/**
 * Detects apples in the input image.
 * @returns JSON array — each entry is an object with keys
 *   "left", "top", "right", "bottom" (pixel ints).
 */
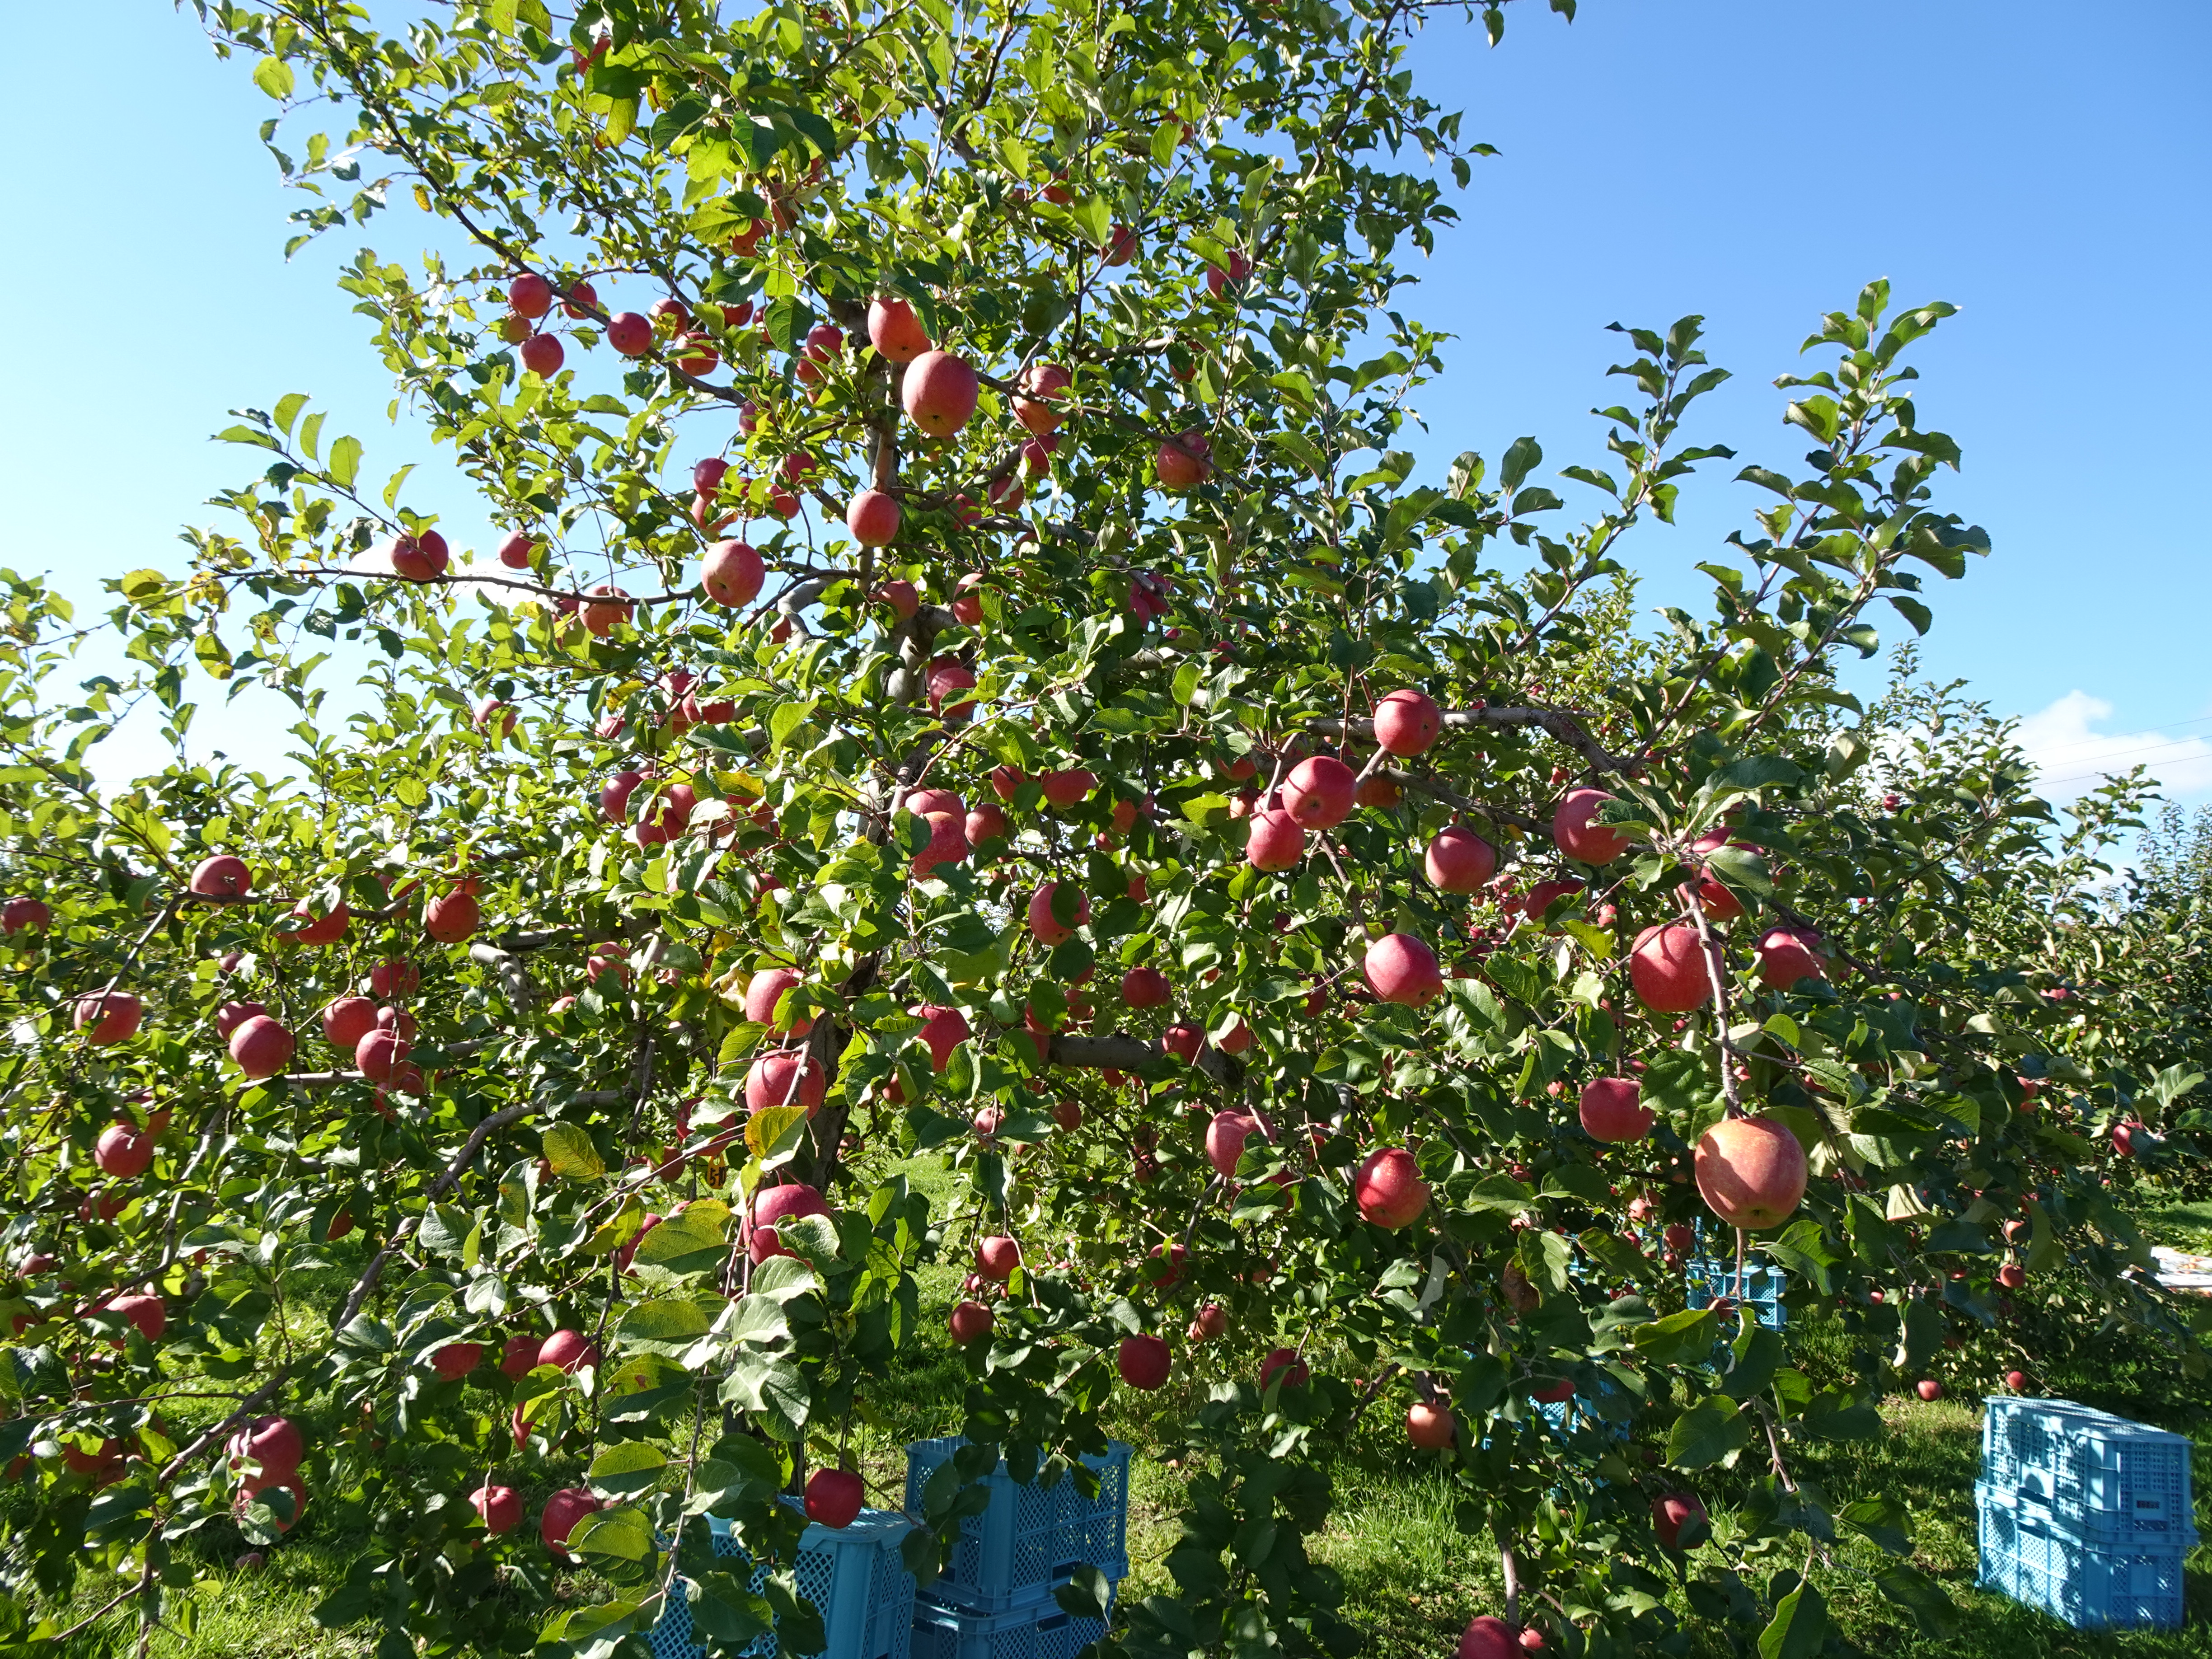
[
  {"left": 450, "top": 848, "right": 487, "bottom": 895},
  {"left": 1218, "top": 614, "right": 1250, "bottom": 642},
  {"left": 1237, "top": 1244, "right": 1282, "bottom": 1290},
  {"left": 1134, "top": 1153, "right": 1174, "bottom": 1189},
  {"left": 744, "top": 963, "right": 819, "bottom": 1040},
  {"left": 74, "top": 1282, "right": 127, "bottom": 1342},
  {"left": 986, "top": 470, "right": 1026, "bottom": 515},
  {"left": 770, "top": 178, "right": 813, "bottom": 213},
  {"left": 681, "top": 681, "right": 737, "bottom": 729},
  {"left": 323, "top": 996, "right": 379, "bottom": 1051},
  {"left": 700, "top": 538, "right": 766, "bottom": 609},
  {"left": 216, "top": 1002, "right": 267, "bottom": 1043},
  {"left": 656, "top": 673, "right": 704, "bottom": 719},
  {"left": 1668, "top": 1037, "right": 1684, "bottom": 1052},
  {"left": 1324, "top": 727, "right": 1359, "bottom": 767},
  {"left": 1119, "top": 1329, "right": 1170, "bottom": 1392},
  {"left": 1881, "top": 791, "right": 1902, "bottom": 813},
  {"left": 544, "top": 995, "right": 598, "bottom": 1048},
  {"left": 654, "top": 700, "right": 695, "bottom": 736},
  {"left": 1186, "top": 1300, "right": 1226, "bottom": 1345},
  {"left": 1575, "top": 1225, "right": 1608, "bottom": 1252},
  {"left": 376, "top": 1007, "right": 416, "bottom": 1050},
  {"left": 1864, "top": 1290, "right": 1885, "bottom": 1306},
  {"left": 677, "top": 1096, "right": 736, "bottom": 1158},
  {"left": 801, "top": 1467, "right": 864, "bottom": 1531},
  {"left": 348, "top": 1420, "right": 390, "bottom": 1449},
  {"left": 1084, "top": 1174, "right": 1108, "bottom": 1203},
  {"left": 1628, "top": 1197, "right": 1665, "bottom": 1227},
  {"left": 1579, "top": 1078, "right": 1656, "bottom": 1144},
  {"left": 2011, "top": 1098, "right": 2033, "bottom": 1117},
  {"left": 655, "top": 964, "right": 690, "bottom": 998},
  {"left": 577, "top": 585, "right": 635, "bottom": 638},
  {"left": 751, "top": 304, "right": 792, "bottom": 345},
  {"left": 894, "top": 1004, "right": 969, "bottom": 1076},
  {"left": 2112, "top": 1120, "right": 2147, "bottom": 1158},
  {"left": 1936, "top": 1273, "right": 1967, "bottom": 1299},
  {"left": 1252, "top": 791, "right": 1290, "bottom": 825},
  {"left": 1180, "top": 1100, "right": 1216, "bottom": 1138},
  {"left": 648, "top": 298, "right": 691, "bottom": 343},
  {"left": 2068, "top": 1128, "right": 2082, "bottom": 1143},
  {"left": 497, "top": 1335, "right": 553, "bottom": 1386},
  {"left": 2165, "top": 1285, "right": 2181, "bottom": 1294},
  {"left": 811, "top": 7, "right": 838, "bottom": 38},
  {"left": 1450, "top": 959, "right": 1482, "bottom": 984},
  {"left": 598, "top": 715, "right": 633, "bottom": 747},
  {"left": 507, "top": 272, "right": 551, "bottom": 318},
  {"left": 2058, "top": 1104, "right": 2077, "bottom": 1119},
  {"left": 2020, "top": 1188, "right": 2039, "bottom": 1211},
  {"left": 2039, "top": 983, "right": 2071, "bottom": 1008},
  {"left": 591, "top": 130, "right": 617, "bottom": 153},
  {"left": 1696, "top": 1115, "right": 1808, "bottom": 1230},
  {"left": 1472, "top": 747, "right": 1489, "bottom": 765},
  {"left": 745, "top": 609, "right": 792, "bottom": 649},
  {"left": 1754, "top": 925, "right": 1831, "bottom": 991},
  {"left": 1549, "top": 763, "right": 1574, "bottom": 786},
  {"left": 867, "top": 288, "right": 948, "bottom": 366},
  {"left": 1944, "top": 1011, "right": 1968, "bottom": 1034},
  {"left": 95, "top": 1124, "right": 154, "bottom": 1179},
  {"left": 1964, "top": 1185, "right": 1988, "bottom": 1211},
  {"left": 978, "top": 1235, "right": 1021, "bottom": 1281},
  {"left": 1147, "top": 1244, "right": 1203, "bottom": 1293},
  {"left": 724, "top": 205, "right": 766, "bottom": 260},
  {"left": 930, "top": 666, "right": 976, "bottom": 721},
  {"left": 1350, "top": 757, "right": 1407, "bottom": 809},
  {"left": 807, "top": 325, "right": 849, "bottom": 366},
  {"left": 1529, "top": 681, "right": 1550, "bottom": 699},
  {"left": 511, "top": 1395, "right": 576, "bottom": 1461},
  {"left": 1927, "top": 995, "right": 1951, "bottom": 1017},
  {"left": 601, "top": 769, "right": 653, "bottom": 827},
  {"left": 1217, "top": 568, "right": 1252, "bottom": 595},
  {"left": 728, "top": 833, "right": 763, "bottom": 864},
  {"left": 1953, "top": 1135, "right": 1971, "bottom": 1153},
  {"left": 1629, "top": 924, "right": 1726, "bottom": 1011},
  {"left": 1599, "top": 904, "right": 1623, "bottom": 931},
  {"left": 1336, "top": 843, "right": 1356, "bottom": 862},
  {"left": 1679, "top": 762, "right": 1695, "bottom": 776},
  {"left": 1600, "top": 717, "right": 1617, "bottom": 734},
  {"left": 1526, "top": 878, "right": 1594, "bottom": 940},
  {"left": 1031, "top": 881, "right": 1088, "bottom": 944},
  {"left": 561, "top": 1422, "right": 605, "bottom": 1465},
  {"left": 1598, "top": 991, "right": 1627, "bottom": 1021},
  {"left": 1010, "top": 364, "right": 1075, "bottom": 437},
  {"left": 1414, "top": 1222, "right": 1471, "bottom": 1278},
  {"left": 1246, "top": 808, "right": 1305, "bottom": 871},
  {"left": 1384, "top": 1050, "right": 1420, "bottom": 1077},
  {"left": 2179, "top": 1262, "right": 2195, "bottom": 1277},
  {"left": 1610, "top": 1183, "right": 1625, "bottom": 1197},
  {"left": 794, "top": 146, "right": 828, "bottom": 189},
  {"left": 1643, "top": 743, "right": 1666, "bottom": 767},
  {"left": 881, "top": 1066, "right": 911, "bottom": 1106},
  {"left": 1061, "top": 956, "right": 1097, "bottom": 988},
  {"left": 665, "top": 1200, "right": 701, "bottom": 1230},
  {"left": 1343, "top": 988, "right": 1377, "bottom": 1021},
  {"left": 671, "top": 333, "right": 720, "bottom": 379},
  {"left": 559, "top": 278, "right": 598, "bottom": 321},
  {"left": 638, "top": 804, "right": 685, "bottom": 859},
  {"left": 408, "top": 1297, "right": 482, "bottom": 1384},
  {"left": 608, "top": 310, "right": 652, "bottom": 357},
  {"left": 901, "top": 349, "right": 980, "bottom": 440},
  {"left": 1261, "top": 1176, "right": 1303, "bottom": 1210},
  {"left": 1039, "top": 163, "right": 1079, "bottom": 204},
  {"left": 1203, "top": 956, "right": 1241, "bottom": 990},
  {"left": 1775, "top": 864, "right": 1799, "bottom": 884},
  {"left": 1424, "top": 825, "right": 1498, "bottom": 895},
  {"left": 648, "top": 1145, "right": 686, "bottom": 1184},
  {"left": 1519, "top": 1625, "right": 1555, "bottom": 1654},
  {"left": 1034, "top": 361, "right": 1088, "bottom": 398},
  {"left": 1205, "top": 641, "right": 1247, "bottom": 674},
  {"left": 18, "top": 1252, "right": 78, "bottom": 1303},
  {"left": 359, "top": 1401, "right": 389, "bottom": 1431},
  {"left": 1944, "top": 1326, "right": 1968, "bottom": 1350},
  {"left": 217, "top": 952, "right": 248, "bottom": 983},
  {"left": 1885, "top": 980, "right": 1903, "bottom": 999},
  {"left": 1259, "top": 1346, "right": 1311, "bottom": 1406},
  {"left": 741, "top": 874, "right": 792, "bottom": 914},
  {"left": 2130, "top": 1262, "right": 2146, "bottom": 1274},
  {"left": 990, "top": 856, "right": 1019, "bottom": 884},
  {"left": 2003, "top": 1219, "right": 2025, "bottom": 1240},
  {"left": 80, "top": 1189, "right": 130, "bottom": 1232},
  {"left": 1129, "top": 788, "right": 1155, "bottom": 815},
  {"left": 66, "top": 1350, "right": 107, "bottom": 1386},
  {"left": 189, "top": 1243, "right": 217, "bottom": 1270},
  {"left": 1044, "top": 758, "right": 1091, "bottom": 811},
  {"left": 645, "top": 868, "right": 696, "bottom": 911},
  {"left": 1167, "top": 109, "right": 1195, "bottom": 147},
  {"left": 387, "top": 1059, "right": 429, "bottom": 1101},
  {"left": 1281, "top": 754, "right": 1359, "bottom": 831},
  {"left": 1224, "top": 1180, "right": 1258, "bottom": 1210},
  {"left": 236, "top": 1552, "right": 264, "bottom": 1582},
  {"left": 1012, "top": 1132, "right": 1046, "bottom": 1158},
  {"left": 1466, "top": 923, "right": 1488, "bottom": 943},
  {"left": 1211, "top": 1012, "right": 1250, "bottom": 1055},
  {"left": 1837, "top": 1292, "right": 1851, "bottom": 1307},
  {"left": 2167, "top": 974, "right": 2176, "bottom": 983},
  {"left": 1598, "top": 956, "right": 1616, "bottom": 970},
  {"left": 669, "top": 767, "right": 727, "bottom": 828},
  {"left": 1352, "top": 1375, "right": 1366, "bottom": 1388},
  {"left": 774, "top": 449, "right": 817, "bottom": 497},
  {"left": 2199, "top": 1287, "right": 2211, "bottom": 1300},
  {"left": 1665, "top": 1220, "right": 1695, "bottom": 1251},
  {"left": 1834, "top": 1166, "right": 1870, "bottom": 1195},
  {"left": 747, "top": 1048, "right": 828, "bottom": 1135},
  {"left": 3, "top": 898, "right": 51, "bottom": 951},
  {"left": 1513, "top": 1156, "right": 1541, "bottom": 1183},
  {"left": 2006, "top": 1369, "right": 2028, "bottom": 1392},
  {"left": 1570, "top": 698, "right": 1585, "bottom": 712},
  {"left": 1229, "top": 788, "right": 1260, "bottom": 826},
  {"left": 2048, "top": 1165, "right": 2058, "bottom": 1179},
  {"left": 1033, "top": 700, "right": 1083, "bottom": 740},
  {"left": 1286, "top": 969, "right": 1330, "bottom": 1020},
  {"left": 391, "top": 528, "right": 449, "bottom": 582},
  {"left": 1597, "top": 666, "right": 1616, "bottom": 682},
  {"left": 537, "top": 1327, "right": 601, "bottom": 1395},
  {"left": 1609, "top": 1274, "right": 1640, "bottom": 1310},
  {"left": 1857, "top": 895, "right": 1869, "bottom": 907},
  {"left": 1520, "top": 1095, "right": 1530, "bottom": 1108},
  {"left": 587, "top": 941, "right": 631, "bottom": 989},
  {"left": 768, "top": 195, "right": 804, "bottom": 230},
  {"left": 763, "top": 483, "right": 804, "bottom": 521},
  {"left": 1373, "top": 689, "right": 1442, "bottom": 758},
  {"left": 1204, "top": 1105, "right": 1276, "bottom": 1180},
  {"left": 797, "top": 353, "right": 830, "bottom": 387},
  {"left": 1043, "top": 1248, "right": 1067, "bottom": 1266},
  {"left": 973, "top": 1106, "right": 1013, "bottom": 1149},
  {"left": 1094, "top": 222, "right": 1138, "bottom": 267},
  {"left": 374, "top": 1073, "right": 429, "bottom": 1126},
  {"left": 1362, "top": 933, "right": 1442, "bottom": 1011},
  {"left": 76, "top": 1384, "right": 114, "bottom": 1419},
  {"left": 1169, "top": 331, "right": 1223, "bottom": 382},
  {"left": 868, "top": 756, "right": 891, "bottom": 778},
  {"left": 372, "top": 955, "right": 421, "bottom": 1002},
  {"left": 647, "top": 81, "right": 674, "bottom": 109},
  {"left": 1005, "top": 178, "right": 1040, "bottom": 212},
  {"left": 690, "top": 500, "right": 733, "bottom": 534},
  {"left": 1857, "top": 1055, "right": 1892, "bottom": 1081},
  {"left": 108, "top": 1296, "right": 167, "bottom": 1350},
  {"left": 1919, "top": 1184, "right": 1932, "bottom": 1199},
  {"left": 906, "top": 814, "right": 966, "bottom": 885},
  {"left": 1895, "top": 1227, "right": 1916, "bottom": 1253},
  {"left": 229, "top": 1016, "right": 298, "bottom": 1080},
  {"left": 358, "top": 1028, "right": 413, "bottom": 1084},
  {"left": 2079, "top": 1026, "right": 2094, "bottom": 1041},
  {"left": 1257, "top": 911, "right": 1293, "bottom": 955},
  {"left": 1663, "top": 1251, "right": 1683, "bottom": 1270},
  {"left": 718, "top": 288, "right": 754, "bottom": 327},
  {"left": 375, "top": 869, "right": 424, "bottom": 919},
  {"left": 1408, "top": 1403, "right": 1456, "bottom": 1452},
  {"left": 557, "top": 597, "right": 584, "bottom": 624},
  {"left": 1028, "top": 677, "right": 1075, "bottom": 729},
  {"left": 623, "top": 1155, "right": 659, "bottom": 1183},
  {"left": 295, "top": 893, "right": 352, "bottom": 947},
  {"left": 932, "top": 277, "right": 966, "bottom": 312},
  {"left": 1354, "top": 1144, "right": 1432, "bottom": 1231},
  {"left": 1802, "top": 1068, "right": 1829, "bottom": 1097},
  {"left": 1596, "top": 1146, "right": 1615, "bottom": 1162},
  {"left": 615, "top": 1361, "right": 658, "bottom": 1401},
  {"left": 1677, "top": 823, "right": 1776, "bottom": 922},
  {"left": 1706, "top": 1294, "right": 1734, "bottom": 1322},
  {"left": 1102, "top": 1056, "right": 1147, "bottom": 1093},
  {"left": 1120, "top": 967, "right": 1174, "bottom": 1012},
  {"left": 1023, "top": 997, "right": 1067, "bottom": 1038},
  {"left": 556, "top": 613, "right": 593, "bottom": 654},
  {"left": 2014, "top": 1076, "right": 2038, "bottom": 1103},
  {"left": 221, "top": 1413, "right": 305, "bottom": 1493},
  {"left": 1554, "top": 1219, "right": 1574, "bottom": 1237},
  {"left": 698, "top": 953, "right": 749, "bottom": 999},
  {"left": 1618, "top": 1234, "right": 1641, "bottom": 1251},
  {"left": 190, "top": 855, "right": 252, "bottom": 913},
  {"left": 1013, "top": 568, "right": 1052, "bottom": 604},
  {"left": 119, "top": 1089, "right": 177, "bottom": 1136},
  {"left": 834, "top": 1132, "right": 866, "bottom": 1161},
  {"left": 1493, "top": 872, "right": 1515, "bottom": 895},
  {"left": 1094, "top": 794, "right": 1138, "bottom": 855},
  {"left": 1468, "top": 693, "right": 1488, "bottom": 713},
  {"left": 638, "top": 768, "right": 673, "bottom": 804},
  {"left": 961, "top": 804, "right": 1006, "bottom": 850},
  {"left": 427, "top": 893, "right": 480, "bottom": 944},
  {"left": 542, "top": 1487, "right": 605, "bottom": 1555},
  {"left": 1064, "top": 981, "right": 1097, "bottom": 1024},
  {"left": 1204, "top": 248, "right": 1258, "bottom": 307},
  {"left": 1556, "top": 1507, "right": 1568, "bottom": 1519},
  {"left": 1356, "top": 1121, "right": 1386, "bottom": 1149},
  {"left": 1457, "top": 1616, "right": 1525, "bottom": 1659},
  {"left": 1115, "top": 859, "right": 1153, "bottom": 905},
  {"left": 1733, "top": 1064, "right": 1756, "bottom": 1087},
  {"left": 66, "top": 1426, "right": 122, "bottom": 1492},
  {"left": 1019, "top": 433, "right": 1067, "bottom": 478},
  {"left": 1917, "top": 1379, "right": 1942, "bottom": 1403},
  {"left": 1049, "top": 1261, "right": 1096, "bottom": 1300},
  {"left": 1655, "top": 1156, "right": 1692, "bottom": 1191},
  {"left": 990, "top": 760, "right": 1041, "bottom": 802},
  {"left": 610, "top": 1212, "right": 665, "bottom": 1282},
  {"left": 1642, "top": 1246, "right": 1657, "bottom": 1261},
  {"left": 1017, "top": 1075, "right": 1048, "bottom": 1106},
  {"left": 1300, "top": 1120, "right": 1338, "bottom": 1159},
  {"left": 739, "top": 397, "right": 789, "bottom": 447},
  {"left": 1448, "top": 811, "right": 1467, "bottom": 829},
  {"left": 496, "top": 529, "right": 539, "bottom": 571},
  {"left": 2190, "top": 1261, "right": 2200, "bottom": 1270},
  {"left": 1119, "top": 574, "right": 1177, "bottom": 629},
  {"left": 467, "top": 1484, "right": 525, "bottom": 1539},
  {"left": 864, "top": 588, "right": 880, "bottom": 604},
  {"left": 1335, "top": 819, "right": 1370, "bottom": 851},
  {"left": 1130, "top": 1117, "right": 1166, "bottom": 1154},
  {"left": 728, "top": 783, "right": 780, "bottom": 830},
  {"left": 1032, "top": 1263, "right": 1047, "bottom": 1277},
  {"left": 1999, "top": 1264, "right": 2027, "bottom": 1289},
  {"left": 1162, "top": 1023, "right": 1207, "bottom": 1069},
  {"left": 1217, "top": 733, "right": 1260, "bottom": 784},
  {"left": 1156, "top": 429, "right": 1215, "bottom": 490},
  {"left": 1164, "top": 605, "right": 1218, "bottom": 658},
  {"left": 962, "top": 1270, "right": 991, "bottom": 1296},
  {"left": 1552, "top": 789, "right": 1633, "bottom": 865},
  {"left": 1483, "top": 1299, "right": 1522, "bottom": 1331},
  {"left": 1016, "top": 1030, "right": 1052, "bottom": 1065},
  {"left": 472, "top": 698, "right": 517, "bottom": 742},
  {"left": 1050, "top": 1100, "right": 1084, "bottom": 1137},
  {"left": 847, "top": 488, "right": 900, "bottom": 549},
  {"left": 496, "top": 310, "right": 535, "bottom": 348},
  {"left": 953, "top": 572, "right": 1010, "bottom": 629},
  {"left": 2101, "top": 1176, "right": 2114, "bottom": 1189},
  {"left": 12, "top": 1300, "right": 48, "bottom": 1336},
  {"left": 232, "top": 1471, "right": 307, "bottom": 1538},
  {"left": 805, "top": 380, "right": 838, "bottom": 409},
  {"left": 689, "top": 868, "right": 719, "bottom": 900},
  {"left": 1278, "top": 616, "right": 1304, "bottom": 639},
  {"left": 3, "top": 1454, "right": 39, "bottom": 1488},
  {"left": 948, "top": 1302, "right": 993, "bottom": 1347},
  {"left": 1619, "top": 1058, "right": 1661, "bottom": 1097},
  {"left": 1545, "top": 1074, "right": 1579, "bottom": 1104},
  {"left": 1016, "top": 1167, "right": 1047, "bottom": 1195},
  {"left": 119, "top": 1407, "right": 172, "bottom": 1467},
  {"left": 881, "top": 579, "right": 921, "bottom": 630},
  {"left": 1728, "top": 798, "right": 1752, "bottom": 824},
  {"left": 530, "top": 1156, "right": 558, "bottom": 1186},
  {"left": 740, "top": 1185, "right": 833, "bottom": 1277},
  {"left": 1671, "top": 1019, "right": 1689, "bottom": 1035},
  {"left": 1466, "top": 943, "right": 1501, "bottom": 975},
  {"left": 1529, "top": 1354, "right": 1579, "bottom": 1405},
  {"left": 837, "top": 97, "right": 868, "bottom": 127},
  {"left": 1122, "top": 1259, "right": 1147, "bottom": 1283},
  {"left": 518, "top": 331, "right": 566, "bottom": 382},
  {"left": 1314, "top": 554, "right": 1338, "bottom": 578},
  {"left": 692, "top": 456, "right": 737, "bottom": 503},
  {"left": 571, "top": 35, "right": 619, "bottom": 81},
  {"left": 1012, "top": 528, "right": 1056, "bottom": 572},
  {"left": 73, "top": 989, "right": 140, "bottom": 1048},
  {"left": 1652, "top": 1485, "right": 1711, "bottom": 1552},
  {"left": 926, "top": 652, "right": 970, "bottom": 705},
  {"left": 143, "top": 884, "right": 194, "bottom": 930},
  {"left": 1504, "top": 908, "right": 1524, "bottom": 933},
  {"left": 730, "top": 478, "right": 769, "bottom": 520},
  {"left": 1247, "top": 0, "right": 1292, "bottom": 23},
  {"left": 922, "top": 429, "right": 961, "bottom": 468},
  {"left": 900, "top": 788, "right": 966, "bottom": 836},
  {"left": 467, "top": 1534, "right": 485, "bottom": 1552},
  {"left": 941, "top": 489, "right": 984, "bottom": 532},
  {"left": 1509, "top": 1213, "right": 1533, "bottom": 1238}
]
